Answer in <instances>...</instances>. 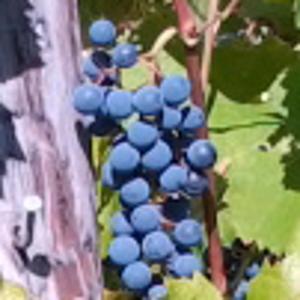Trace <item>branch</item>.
I'll use <instances>...</instances> for the list:
<instances>
[{
    "label": "branch",
    "mask_w": 300,
    "mask_h": 300,
    "mask_svg": "<svg viewBox=\"0 0 300 300\" xmlns=\"http://www.w3.org/2000/svg\"><path fill=\"white\" fill-rule=\"evenodd\" d=\"M175 8L178 25L181 27L179 36L183 46L190 83L189 101L191 104L199 106L205 114L203 129L196 131L195 136L197 140H207L210 113L208 112V104L204 93L208 87L211 58L218 39L220 0H209L208 24L201 63L196 47L198 44L197 26L193 13L189 9V3L187 0H177Z\"/></svg>",
    "instance_id": "30e6481e"
},
{
    "label": "branch",
    "mask_w": 300,
    "mask_h": 300,
    "mask_svg": "<svg viewBox=\"0 0 300 300\" xmlns=\"http://www.w3.org/2000/svg\"><path fill=\"white\" fill-rule=\"evenodd\" d=\"M213 170H200V174L210 181V195L203 198L205 208V233L208 235V250L211 263L212 283L220 295L227 293L224 267V241L219 232V201L216 199V181Z\"/></svg>",
    "instance_id": "325d2c04"
}]
</instances>
